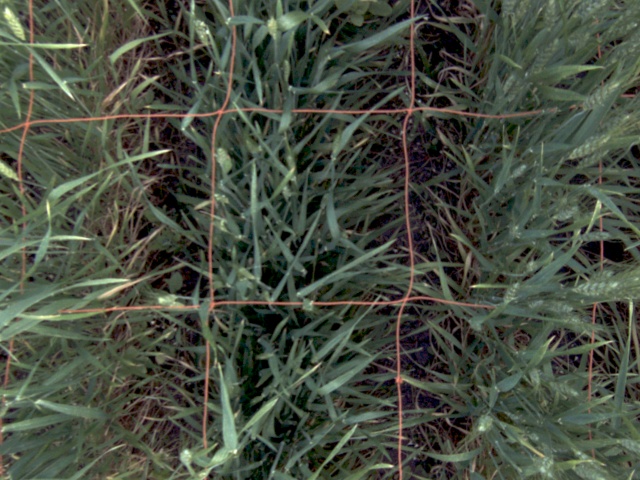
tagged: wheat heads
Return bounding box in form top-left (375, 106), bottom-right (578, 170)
top-left (509, 225), bottom-right (520, 238)
top-left (550, 300), bottom-right (574, 316)
top-left (265, 17), bottom-right (279, 42)
top-left (156, 295), bottom-right (185, 314)
top-left (285, 59), bottom-right (292, 84)
top-left (574, 467), bottom-right (609, 480)
top-left (528, 299), bottom-right (545, 313)
top-left (578, 152), bottom-right (614, 169)
top-left (578, 0), bottom-right (604, 21)
top-left (282, 188), bottom-right (294, 201)
top-left (514, 1), bottom-right (528, 24)
top-left (562, 138), bottom-right (611, 163)
top-left (571, 283), bottom-right (620, 298)
top-left (217, 148), bottom-right (238, 179)
top-left (286, 152), bottom-right (301, 181)
top-left (604, 43), bottom-right (640, 66)
top-left (577, 272), bottom-right (612, 296)
top-left (548, 0), bottom-right (558, 28)
top-left (577, 87), bottom-right (617, 111)
top-left (550, 203), bottom-right (577, 224)
top-left (503, 284), bottom-right (521, 306)
top-left (575, 33), bottom-right (592, 51)
top-left (504, 0), bottom-right (516, 18)
top-left (0, 159), bottom-right (19, 185)
top-left (509, 167), bottom-right (527, 182)
top-left (191, 18), bottom-right (213, 48)
top-left (213, 193), bottom-right (232, 204)
top-left (567, 445), bottom-right (596, 463)
top-left (177, 448), bottom-right (197, 469)
top-left (573, 230), bottom-right (612, 243)
top-left (481, 416), bottom-right (498, 431)
top-left (529, 367), bottom-right (544, 388)
top-left (550, 379), bottom-right (576, 398)
top-left (540, 460), bottom-right (555, 475)
top-left (615, 437), bottom-right (634, 449)
top-left (607, 7), bottom-right (640, 38)
top-left (533, 42), bottom-right (559, 73)
top-left (2, 8), bottom-right (26, 41)
top-left (500, 76), bottom-right (515, 93)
